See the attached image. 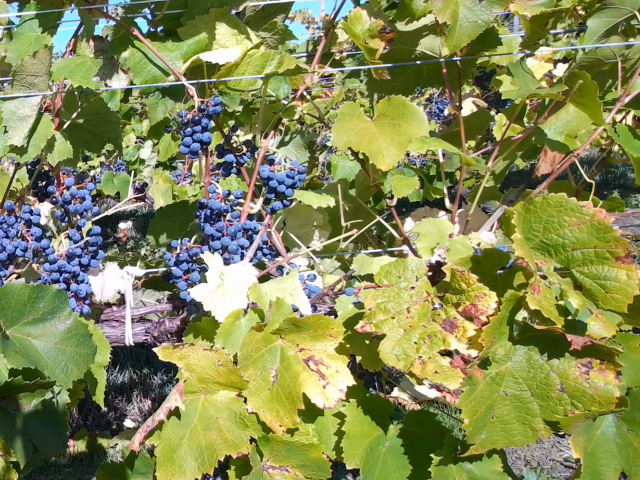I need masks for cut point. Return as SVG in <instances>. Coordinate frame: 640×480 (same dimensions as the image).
<instances>
[{
	"label": "cut point",
	"mask_w": 640,
	"mask_h": 480,
	"mask_svg": "<svg viewBox=\"0 0 640 480\" xmlns=\"http://www.w3.org/2000/svg\"><path fill=\"white\" fill-rule=\"evenodd\" d=\"M182 84L186 87H190L192 89V91L195 93V97H194V103H197V91L196 89L189 83H187L186 81H182Z\"/></svg>",
	"instance_id": "2"
},
{
	"label": "cut point",
	"mask_w": 640,
	"mask_h": 480,
	"mask_svg": "<svg viewBox=\"0 0 640 480\" xmlns=\"http://www.w3.org/2000/svg\"><path fill=\"white\" fill-rule=\"evenodd\" d=\"M268 150L273 151L278 154L279 161L284 162L283 153L276 148H272L268 146Z\"/></svg>",
	"instance_id": "1"
}]
</instances>
